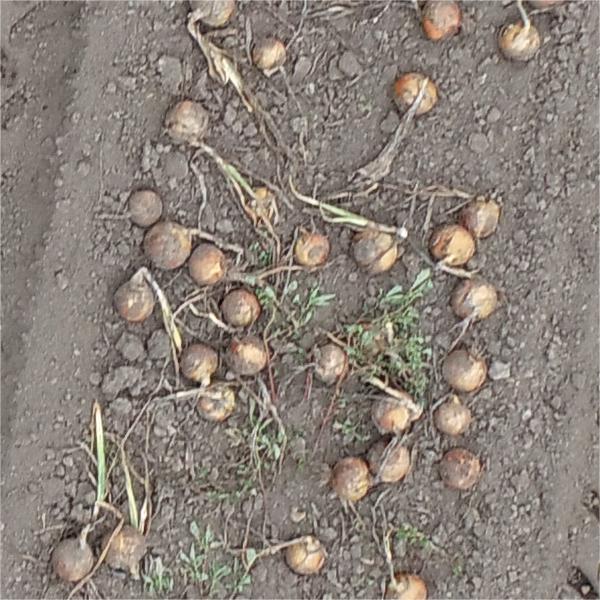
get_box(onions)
[443,349,486,391]
[387,573,427,599]
[329,458,370,501]
[193,0,235,28]
[125,187,162,225]
[372,396,412,434]
[218,288,258,329]
[392,73,437,114]
[289,229,327,268]
[428,224,473,267]
[112,273,154,322]
[311,343,346,380]
[352,229,398,271]
[104,523,145,571]
[376,441,412,480]
[433,398,469,435]
[50,535,94,582]
[145,222,191,267]
[185,245,223,284]
[414,0,461,43]
[250,37,286,70]
[179,343,217,381]
[439,446,482,489]
[498,19,539,60]
[284,535,323,571]
[227,336,266,372]
[454,279,497,318]
[242,184,278,227]
[163,101,209,143]
[461,198,498,235]
[195,384,233,420]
